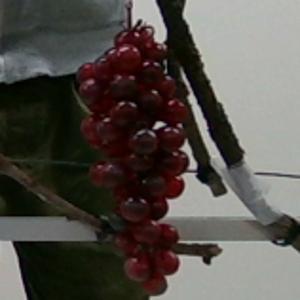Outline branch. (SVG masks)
<instances>
[{"mask_svg": "<svg viewBox=\"0 0 300 300\" xmlns=\"http://www.w3.org/2000/svg\"><path fill=\"white\" fill-rule=\"evenodd\" d=\"M153 1L166 30L161 44L168 52L166 75L176 84L172 99L182 102L186 110L185 119L179 125L184 128L190 155L196 163L195 179L217 199L229 193L227 184L260 226L300 254V220L275 208L252 175L245 161L246 150L241 146L224 104L217 97L185 16L188 0ZM191 92L221 160L211 155L207 148L189 100Z\"/></svg>", "mask_w": 300, "mask_h": 300, "instance_id": "branch-1", "label": "branch"}, {"mask_svg": "<svg viewBox=\"0 0 300 300\" xmlns=\"http://www.w3.org/2000/svg\"><path fill=\"white\" fill-rule=\"evenodd\" d=\"M0 171L12 182L31 192L41 203L58 210L68 222H77L81 226L92 230L99 243L106 244L109 240H112L116 231L111 228L108 219L94 216L78 208L59 194L40 185L1 153Z\"/></svg>", "mask_w": 300, "mask_h": 300, "instance_id": "branch-2", "label": "branch"}, {"mask_svg": "<svg viewBox=\"0 0 300 300\" xmlns=\"http://www.w3.org/2000/svg\"><path fill=\"white\" fill-rule=\"evenodd\" d=\"M178 256L198 257L205 266H212V260L223 254L224 248L219 243H179L174 250Z\"/></svg>", "mask_w": 300, "mask_h": 300, "instance_id": "branch-3", "label": "branch"}]
</instances>
